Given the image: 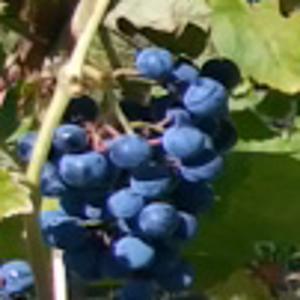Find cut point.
Returning a JSON list of instances; mask_svg holds the SVG:
<instances>
[{
  "label": "cut point",
  "mask_w": 300,
  "mask_h": 300,
  "mask_svg": "<svg viewBox=\"0 0 300 300\" xmlns=\"http://www.w3.org/2000/svg\"><path fill=\"white\" fill-rule=\"evenodd\" d=\"M79 73L89 81L97 83L101 87L102 100L108 109L112 110L119 108L120 101L115 94L113 80L107 73L96 69L86 60L83 61Z\"/></svg>",
  "instance_id": "6a23745f"
}]
</instances>
